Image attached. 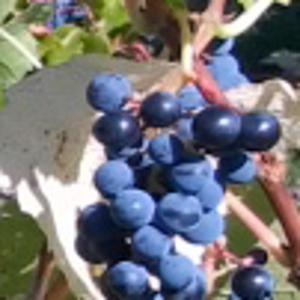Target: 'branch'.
<instances>
[{
  "instance_id": "1",
  "label": "branch",
  "mask_w": 300,
  "mask_h": 300,
  "mask_svg": "<svg viewBox=\"0 0 300 300\" xmlns=\"http://www.w3.org/2000/svg\"><path fill=\"white\" fill-rule=\"evenodd\" d=\"M261 183L277 221L288 235L291 250L300 254V212L291 200L285 180L286 160L275 151H261L256 156Z\"/></svg>"
},
{
  "instance_id": "2",
  "label": "branch",
  "mask_w": 300,
  "mask_h": 300,
  "mask_svg": "<svg viewBox=\"0 0 300 300\" xmlns=\"http://www.w3.org/2000/svg\"><path fill=\"white\" fill-rule=\"evenodd\" d=\"M147 6L157 22L161 39L168 51L167 58L172 63H177L182 58L181 43L178 36L176 17L168 12L164 0H148Z\"/></svg>"
},
{
  "instance_id": "3",
  "label": "branch",
  "mask_w": 300,
  "mask_h": 300,
  "mask_svg": "<svg viewBox=\"0 0 300 300\" xmlns=\"http://www.w3.org/2000/svg\"><path fill=\"white\" fill-rule=\"evenodd\" d=\"M191 68L203 97L210 103L224 104L227 95L222 89L215 87L205 59L201 56L194 57L191 61Z\"/></svg>"
}]
</instances>
